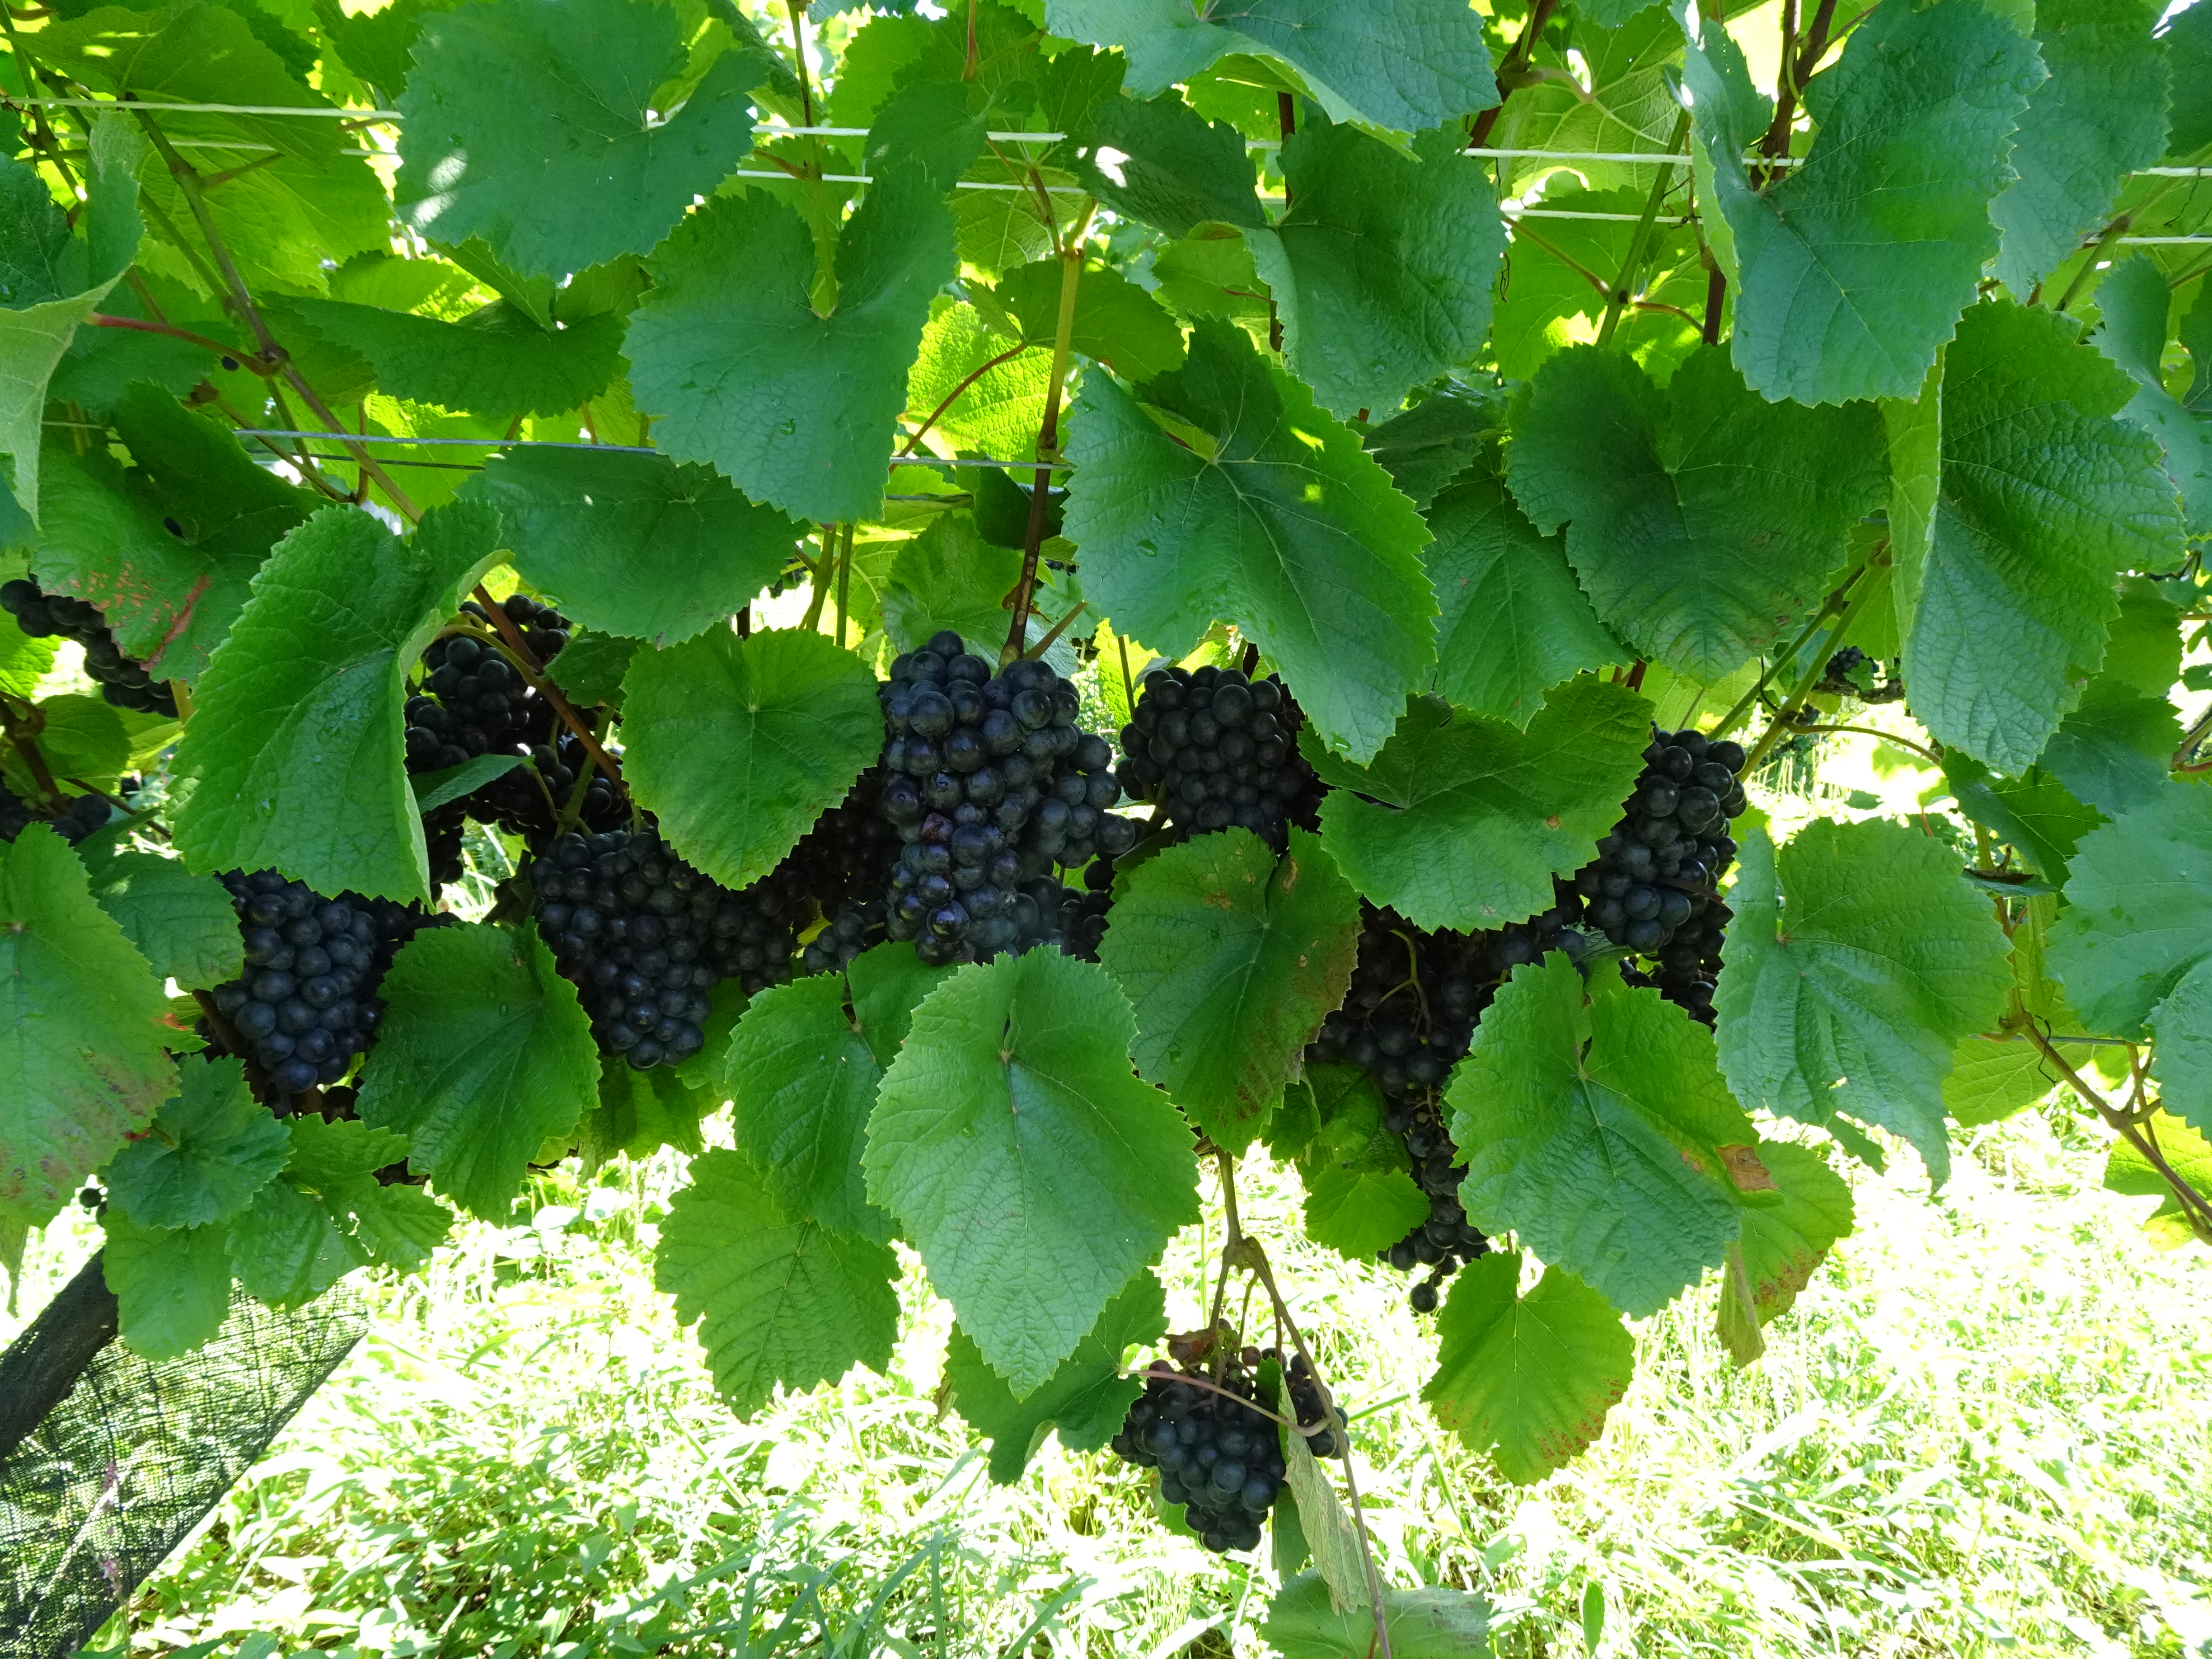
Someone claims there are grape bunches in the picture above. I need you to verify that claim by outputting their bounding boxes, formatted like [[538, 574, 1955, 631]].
[[359, 907, 462, 1063], [1059, 887, 1115, 963], [1110, 1319, 1349, 1553], [320, 1067, 419, 1187], [1574, 720, 1747, 954], [1018, 735, 1134, 876], [1329, 895, 1461, 1009], [404, 693, 472, 905], [781, 751, 906, 922], [211, 867, 386, 1095], [524, 693, 606, 750], [421, 594, 572, 740], [1642, 839, 1735, 974], [877, 630, 1080, 967], [0, 775, 112, 846], [803, 901, 890, 1002], [1619, 956, 1718, 1034], [1115, 665, 1322, 866], [164, 1016, 293, 1120], [0, 566, 179, 718], [79, 1188, 108, 1228], [1442, 894, 1588, 1038], [704, 864, 809, 998], [1083, 814, 1163, 892], [467, 737, 633, 846], [527, 826, 724, 1071], [1376, 1226, 1491, 1313], [1308, 999, 1489, 1247]]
